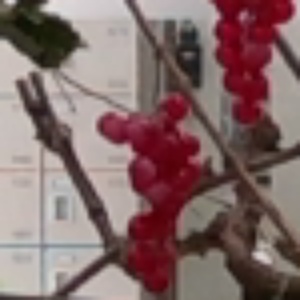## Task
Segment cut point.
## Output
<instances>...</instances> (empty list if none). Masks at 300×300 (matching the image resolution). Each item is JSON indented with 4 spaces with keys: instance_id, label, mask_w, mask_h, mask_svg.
<instances>
[{
    "instance_id": "cut-point-1",
    "label": "cut point",
    "mask_w": 300,
    "mask_h": 300,
    "mask_svg": "<svg viewBox=\"0 0 300 300\" xmlns=\"http://www.w3.org/2000/svg\"><path fill=\"white\" fill-rule=\"evenodd\" d=\"M154 56H155V70H154V77L156 82V89L154 93L151 96V105L157 109L158 102L156 101V98L160 94L161 89V79H160V52L157 48L154 50Z\"/></svg>"
}]
</instances>
